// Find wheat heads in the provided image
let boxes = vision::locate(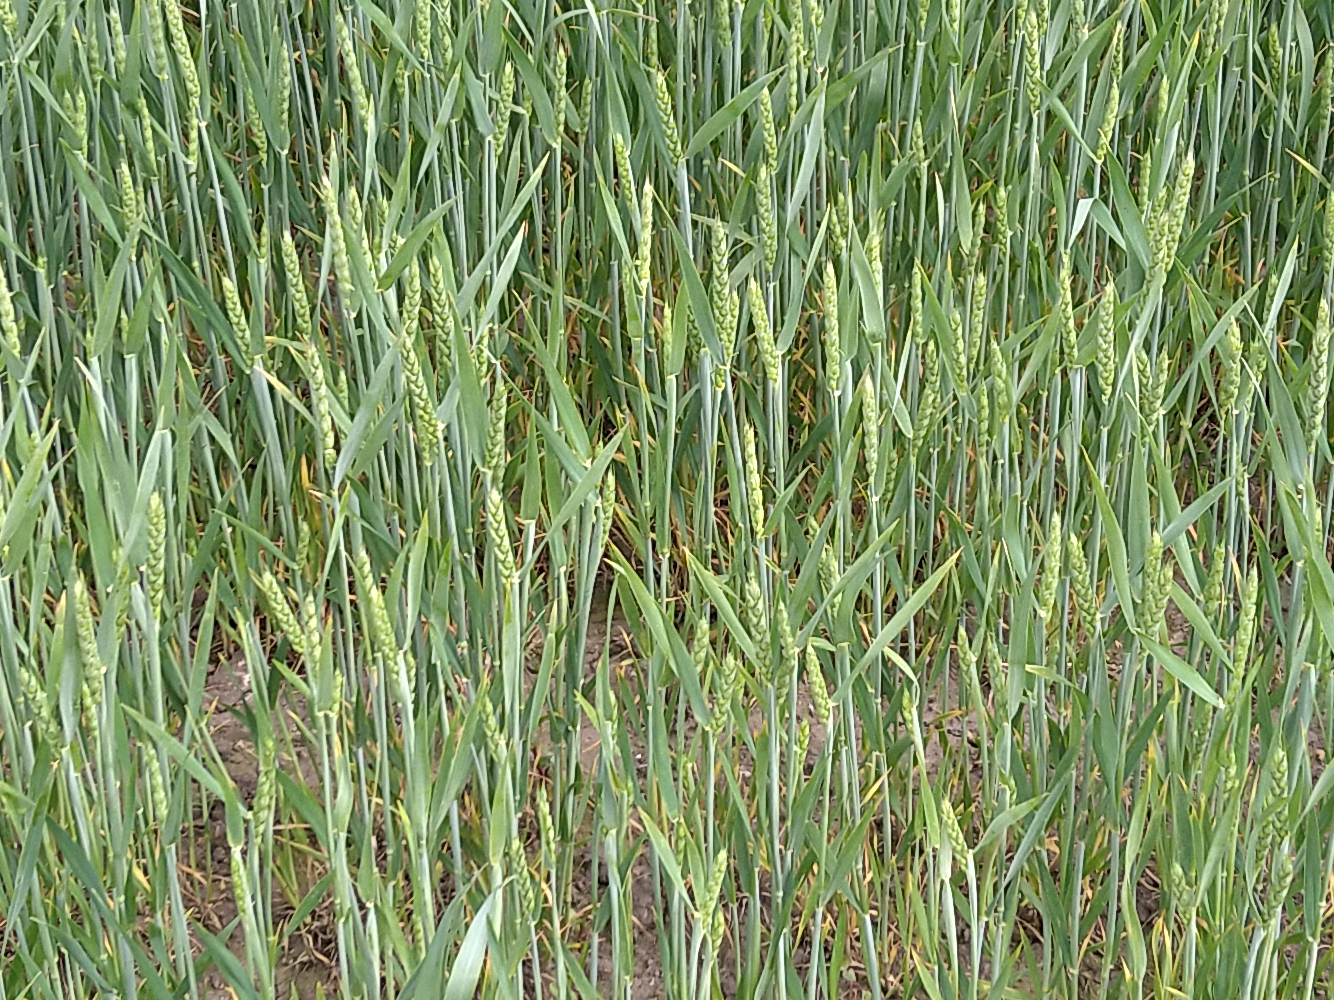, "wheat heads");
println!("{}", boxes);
[663,302,675,378]
[262,567,307,662]
[902,687,914,740]
[429,259,466,403]
[1044,603,1060,683]
[1159,75,1169,119]
[222,276,252,363]
[1305,299,1330,438]
[338,370,347,413]
[1016,0,1032,26]
[1152,563,1174,621]
[703,850,726,928]
[456,641,469,673]
[579,79,593,148]
[147,741,171,828]
[1141,347,1169,449]
[145,0,170,76]
[1024,7,1042,114]
[614,133,634,198]
[987,634,1009,730]
[866,230,882,295]
[998,192,1012,264]
[1151,217,1170,266]
[651,72,682,175]
[22,669,66,764]
[1269,23,1284,95]
[186,107,198,177]
[305,591,319,666]
[1067,532,1099,640]
[707,652,737,732]
[600,466,617,548]
[405,647,416,689]
[798,0,820,47]
[1170,862,1187,911]
[343,193,376,286]
[608,691,617,738]
[1225,763,1239,831]
[824,259,841,387]
[947,0,962,30]
[435,0,451,60]
[710,222,729,304]
[75,88,85,146]
[1260,854,1295,922]
[1144,535,1164,625]
[511,841,532,914]
[81,682,102,778]
[676,762,691,815]
[977,383,988,453]
[1235,465,1245,516]
[754,164,776,263]
[266,740,277,799]
[713,290,739,387]
[640,182,652,282]
[139,97,153,174]
[520,54,533,105]
[617,774,631,815]
[1265,275,1280,325]
[971,275,987,365]
[1036,0,1047,22]
[1228,562,1260,688]
[691,617,711,674]
[535,786,554,846]
[953,310,968,380]
[91,23,102,89]
[163,0,205,98]
[744,423,763,534]
[941,796,967,871]
[1167,154,1194,263]
[992,376,1007,413]
[620,254,631,293]
[360,552,405,699]
[553,45,566,148]
[280,41,290,128]
[325,191,354,307]
[774,600,796,658]
[0,468,11,555]
[284,242,311,338]
[248,80,268,154]
[414,0,429,59]
[118,162,137,234]
[486,381,508,485]
[802,643,828,725]
[477,308,492,380]
[990,334,1007,385]
[747,276,778,383]
[1207,0,1219,60]
[256,218,268,264]
[957,624,976,708]
[885,450,898,503]
[1061,269,1077,363]
[1109,22,1125,84]
[255,775,269,844]
[733,647,744,698]
[413,911,425,956]
[912,0,930,33]
[1097,80,1121,159]
[395,53,403,96]
[1072,0,1085,38]
[296,519,312,567]
[1194,711,1207,760]
[809,518,838,616]
[143,492,166,617]
[396,344,447,457]
[774,657,796,713]
[1258,813,1273,864]
[913,115,923,160]
[686,302,704,363]
[862,375,879,476]
[73,580,107,703]
[969,207,986,275]
[1138,152,1151,219]
[333,9,367,119]
[711,906,726,958]
[594,440,603,500]
[926,341,938,377]
[1310,510,1325,551]
[1247,340,1270,409]
[1265,751,1290,844]
[485,485,516,587]
[0,249,20,357]
[1150,187,1167,219]
[786,0,816,61]
[1323,205,1334,279]
[401,253,421,344]
[715,0,731,44]
[60,93,78,131]
[1200,545,1226,622]
[836,190,851,238]
[743,575,773,684]
[796,717,811,763]
[826,209,843,256]
[413,421,432,462]
[1094,285,1114,401]
[231,850,249,918]
[673,817,685,867]
[495,64,514,153]
[1137,347,1152,413]
[911,361,943,454]
[1320,52,1334,131]
[760,86,776,160]
[110,7,127,69]
[912,261,923,338]
[1221,327,1241,413]
[376,199,390,264]
[477,696,507,765]
[307,345,335,473]
[1035,513,1062,607]
[786,26,799,113]
[115,555,134,635]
